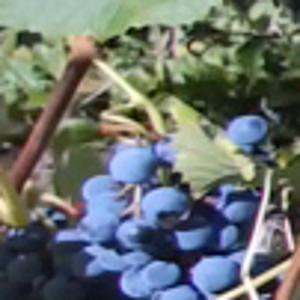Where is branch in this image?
<instances>
[{
  "mask_svg": "<svg viewBox=\"0 0 300 300\" xmlns=\"http://www.w3.org/2000/svg\"><path fill=\"white\" fill-rule=\"evenodd\" d=\"M72 54L61 72L58 84L43 112L36 119L28 138L20 148L10 170L12 190L24 192L27 181L36 169L41 153L50 142L56 127L65 117L73 98L85 77L92 70L96 40L92 36L79 37L72 42Z\"/></svg>",
  "mask_w": 300,
  "mask_h": 300,
  "instance_id": "30e6481e",
  "label": "branch"
}]
</instances>
